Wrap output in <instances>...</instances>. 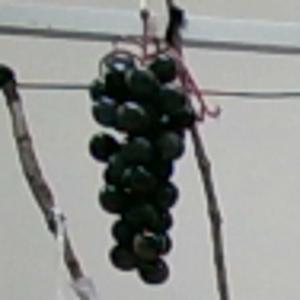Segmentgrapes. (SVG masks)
<instances>
[{"label":"grapes","instance_id":"1","mask_svg":"<svg viewBox=\"0 0 300 300\" xmlns=\"http://www.w3.org/2000/svg\"><path fill=\"white\" fill-rule=\"evenodd\" d=\"M106 76L91 82L88 95L96 124L127 134L121 142L107 132L91 137L88 150L94 160L107 163L105 184L98 193L100 207L118 215L110 235L115 244L108 253L112 267L122 272L136 268L150 286L167 281L170 268L163 256L173 240L169 208L179 189L169 180L172 161L185 151V132L193 128L196 111L187 90L169 88L180 72L176 58L160 54L140 70L131 56L117 53L104 64Z\"/></svg>","mask_w":300,"mask_h":300}]
</instances>
